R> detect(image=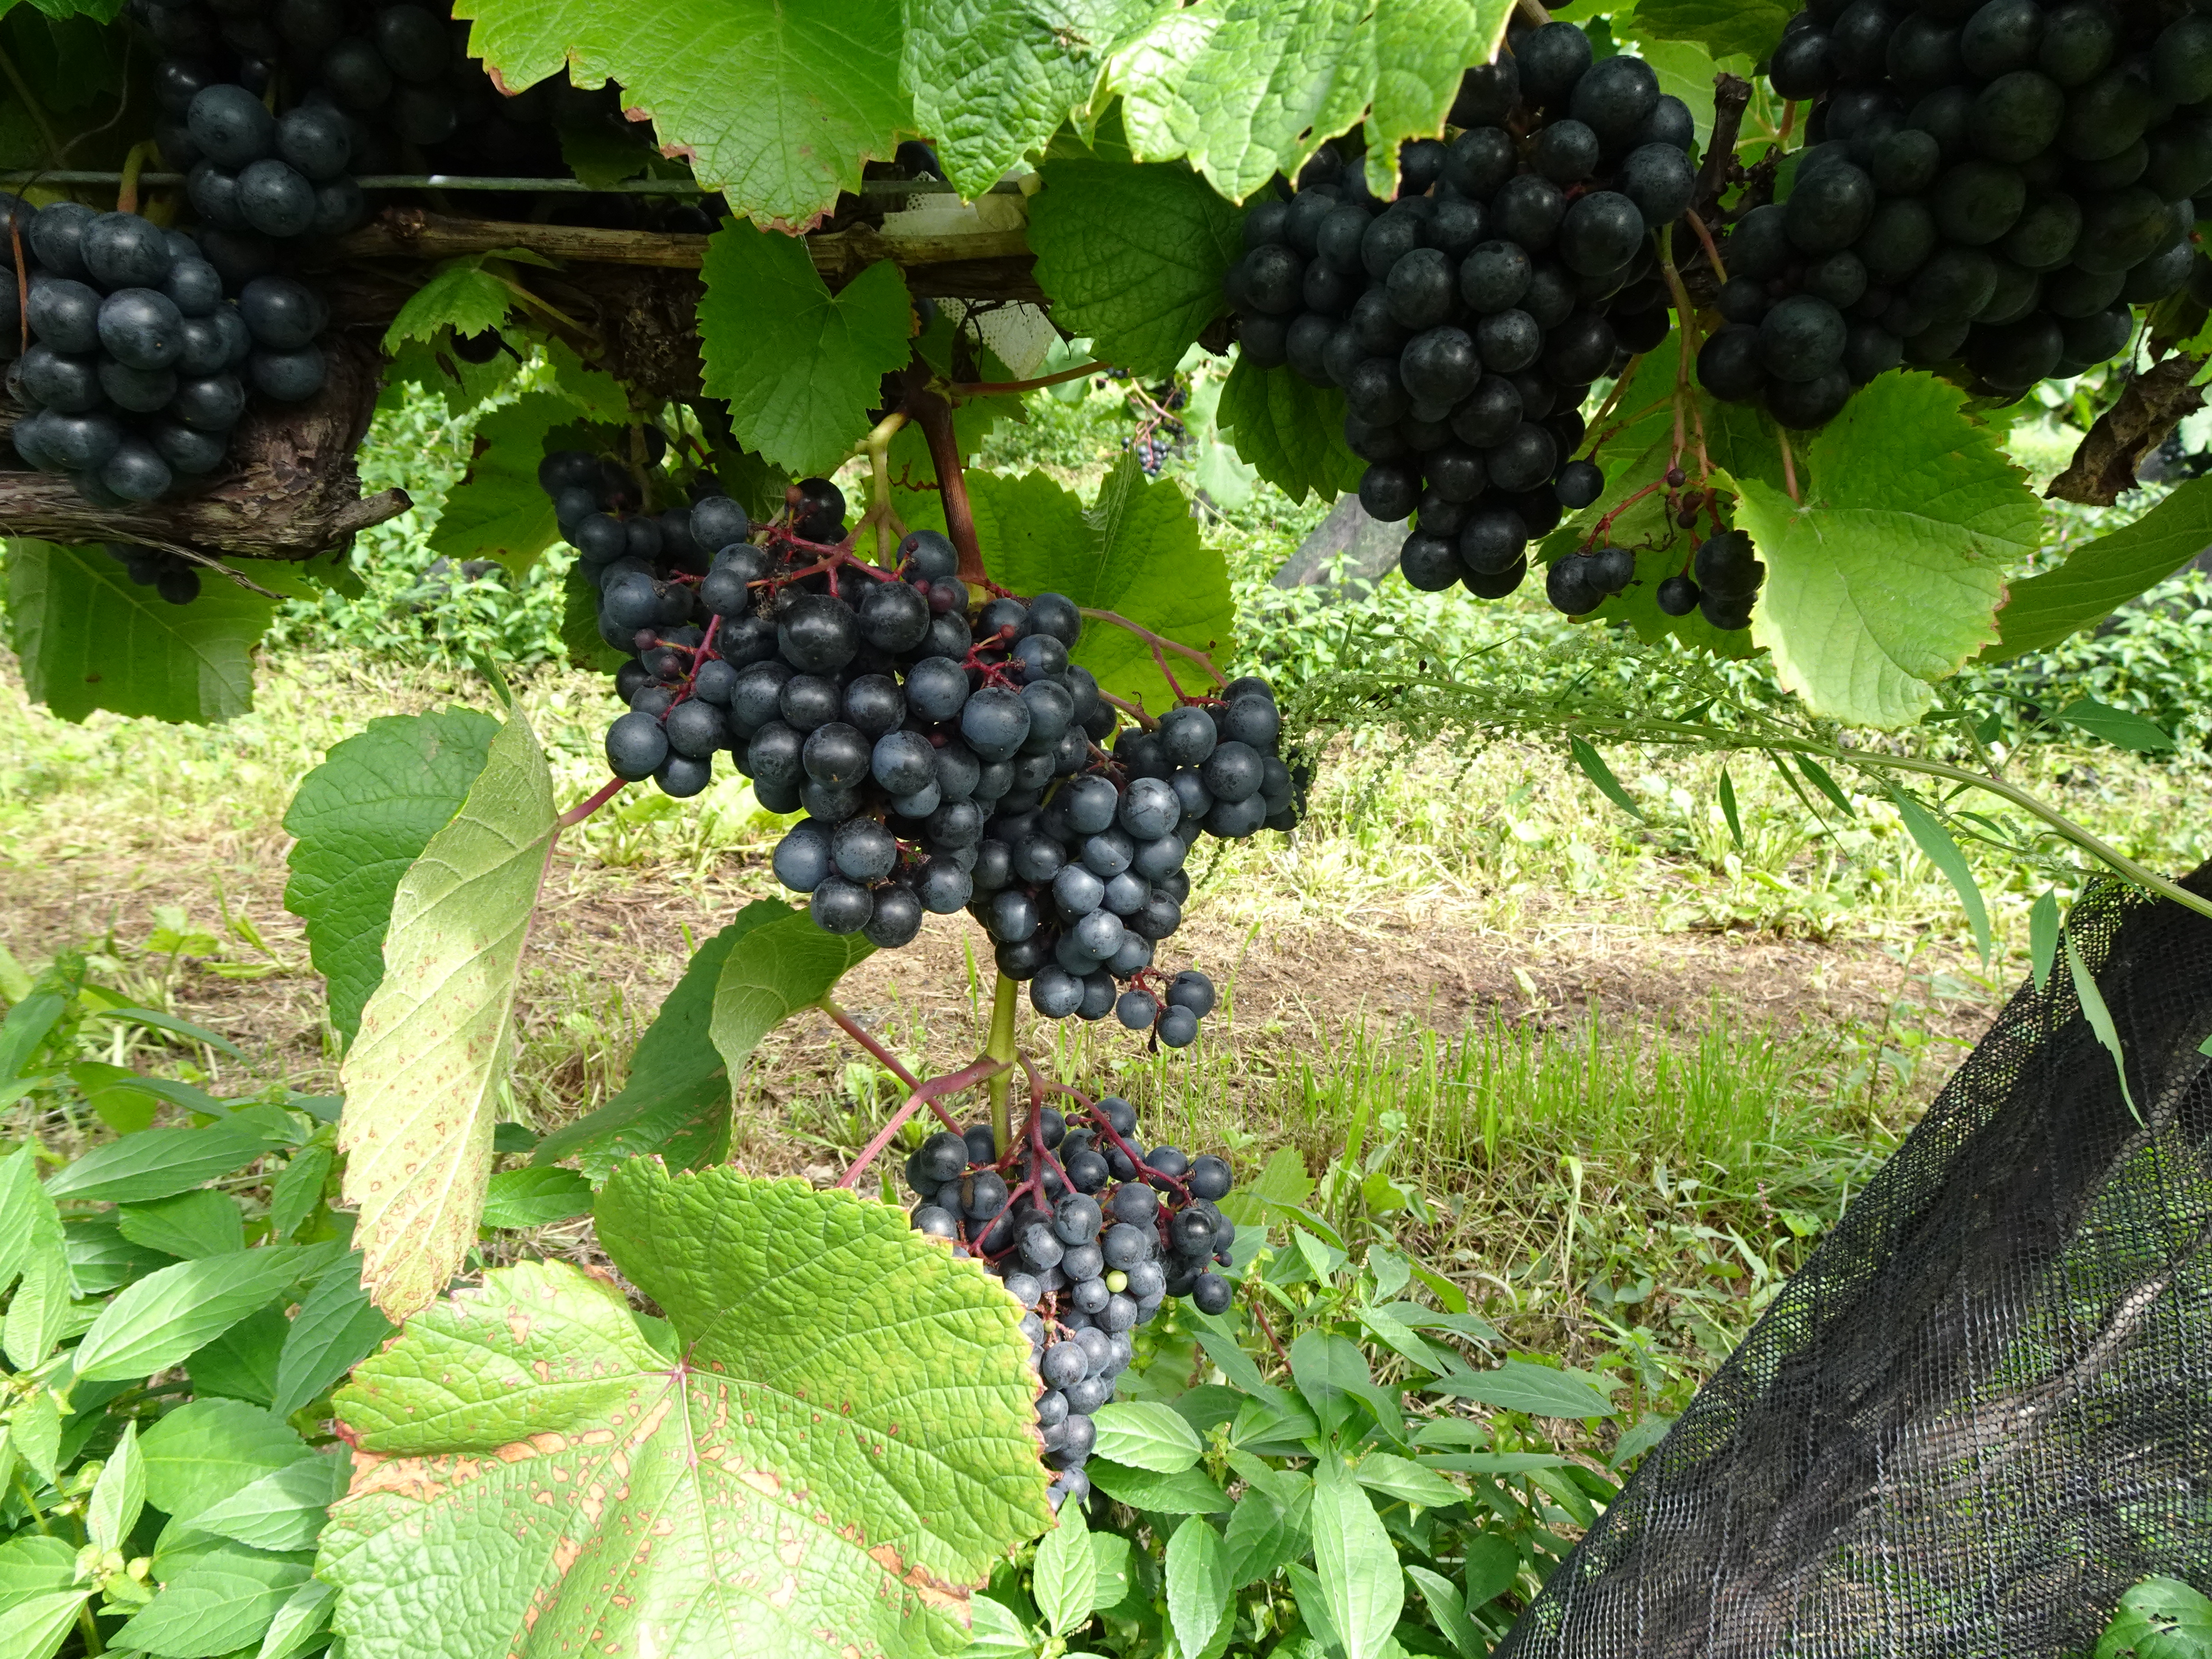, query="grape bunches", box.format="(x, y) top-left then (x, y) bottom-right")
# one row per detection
(538, 436), (847, 795)
(151, 0), (462, 238)
(104, 538), (222, 605)
(905, 1096), (1233, 1514)
(0, 191), (326, 514)
(1237, 21), (1698, 598)
(1117, 969), (1216, 1047)
(892, 142), (942, 179)
(720, 579), (930, 815)
(1115, 674), (1318, 839)
(1546, 459), (1762, 630)
(967, 775), (1201, 1019)
(1695, 0), (2212, 427)
(773, 529), (1114, 946)
(449, 322), (503, 364)
(661, 191), (732, 234)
